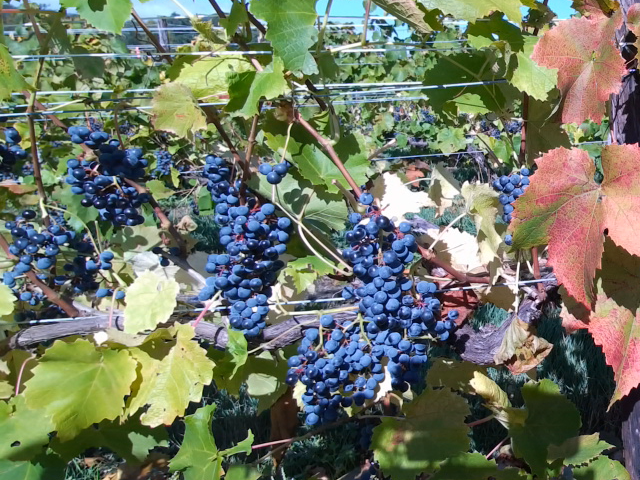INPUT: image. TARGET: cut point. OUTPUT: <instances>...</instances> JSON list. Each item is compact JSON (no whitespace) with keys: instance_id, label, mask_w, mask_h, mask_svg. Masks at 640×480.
<instances>
[{"instance_id":"6a23745f","label":"cut point","mask_w":640,"mask_h":480,"mask_svg":"<svg viewBox=\"0 0 640 480\" xmlns=\"http://www.w3.org/2000/svg\"><path fill=\"white\" fill-rule=\"evenodd\" d=\"M295 120H296V116L292 115L290 120L288 121V128H287V130L285 132V141L286 142L290 141V134L292 133L293 124H294Z\"/></svg>"},{"instance_id":"7d7e1d6f","label":"cut point","mask_w":640,"mask_h":480,"mask_svg":"<svg viewBox=\"0 0 640 480\" xmlns=\"http://www.w3.org/2000/svg\"><path fill=\"white\" fill-rule=\"evenodd\" d=\"M39 206H40V209H41V211L43 213V215L41 216V219H44L47 216V211L44 209L43 204L40 203V200H39Z\"/></svg>"}]
</instances>
